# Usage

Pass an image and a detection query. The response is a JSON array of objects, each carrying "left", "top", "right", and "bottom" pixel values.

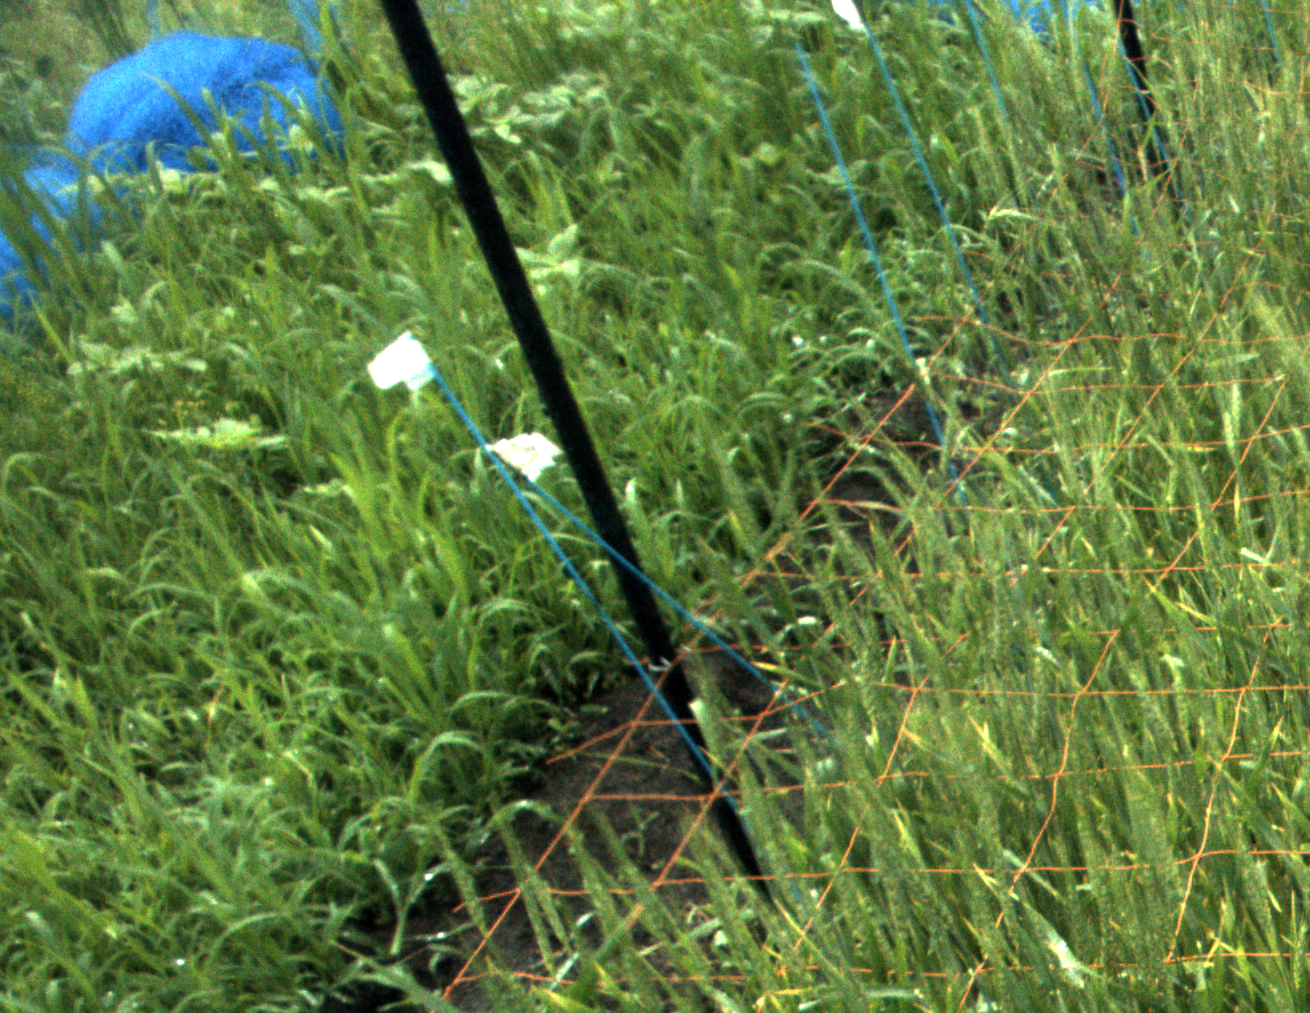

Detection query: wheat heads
[
  {"left": 871, "top": 836, "right": 956, "bottom": 929},
  {"left": 1249, "top": 151, "right": 1277, "bottom": 204},
  {"left": 1144, "top": 921, "right": 1174, "bottom": 1006},
  {"left": 984, "top": 834, "right": 1025, "bottom": 938},
  {"left": 810, "top": 558, "right": 839, "bottom": 627},
  {"left": 1118, "top": 192, "right": 1137, "bottom": 284},
  {"left": 1199, "top": 697, "right": 1218, "bottom": 752},
  {"left": 911, "top": 503, "right": 961, "bottom": 569},
  {"left": 999, "top": 695, "right": 1024, "bottom": 779},
  {"left": 721, "top": 894, "right": 794, "bottom": 1013},
  {"left": 1228, "top": 381, "right": 1242, "bottom": 434},
  {"left": 1141, "top": 866, "right": 1179, "bottom": 941},
  {"left": 1292, "top": 533, "right": 1310, "bottom": 627},
  {"left": 816, "top": 854, "right": 871, "bottom": 951},
  {"left": 1217, "top": 8, "right": 1242, "bottom": 83},
  {"left": 1194, "top": 476, "right": 1223, "bottom": 558},
  {"left": 507, "top": 969, "right": 546, "bottom": 1013},
  {"left": 696, "top": 853, "right": 759, "bottom": 964},
  {"left": 1221, "top": 237, "right": 1239, "bottom": 282},
  {"left": 855, "top": 774, "right": 904, "bottom": 846},
  {"left": 855, "top": 647, "right": 877, "bottom": 716},
  {"left": 442, "top": 849, "right": 489, "bottom": 939},
  {"left": 836, "top": 585, "right": 859, "bottom": 645},
  {"left": 1267, "top": 423, "right": 1293, "bottom": 455},
  {"left": 1075, "top": 817, "right": 1108, "bottom": 880},
  {"left": 1195, "top": 61, "right": 1205, "bottom": 126},
  {"left": 1055, "top": 552, "right": 1077, "bottom": 604},
  {"left": 1025, "top": 472, "right": 1054, "bottom": 504},
  {"left": 1055, "top": 434, "right": 1084, "bottom": 498},
  {"left": 730, "top": 874, "right": 806, "bottom": 958},
  {"left": 1304, "top": 143, "right": 1310, "bottom": 209},
  {"left": 1237, "top": 839, "right": 1273, "bottom": 940},
  {"left": 1180, "top": 157, "right": 1203, "bottom": 212},
  {"left": 862, "top": 895, "right": 896, "bottom": 963},
  {"left": 960, "top": 760, "right": 1003, "bottom": 834},
  {"left": 1099, "top": 124, "right": 1113, "bottom": 181},
  {"left": 886, "top": 450, "right": 921, "bottom": 494},
  {"left": 1110, "top": 841, "right": 1146, "bottom": 924},
  {"left": 518, "top": 880, "right": 557, "bottom": 973},
  {"left": 1029, "top": 655, "right": 1047, "bottom": 745},
  {"left": 1221, "top": 116, "right": 1242, "bottom": 166},
  {"left": 1171, "top": 54, "right": 1197, "bottom": 130},
  {"left": 1005, "top": 474, "right": 1037, "bottom": 510},
  {"left": 870, "top": 519, "right": 918, "bottom": 602},
  {"left": 1076, "top": 226, "right": 1113, "bottom": 285},
  {"left": 1071, "top": 44, "right": 1087, "bottom": 113},
  {"left": 1217, "top": 409, "right": 1238, "bottom": 460},
  {"left": 1290, "top": 422, "right": 1310, "bottom": 469},
  {"left": 1147, "top": 341, "right": 1192, "bottom": 416},
  {"left": 1018, "top": 57, "right": 1052, "bottom": 143},
  {"left": 1268, "top": 980, "right": 1309, "bottom": 1013},
  {"left": 1065, "top": 751, "right": 1088, "bottom": 807},
  {"left": 1152, "top": 183, "right": 1178, "bottom": 227},
  {"left": 878, "top": 857, "right": 918, "bottom": 938},
  {"left": 709, "top": 433, "right": 764, "bottom": 547},
  {"left": 1090, "top": 552, "right": 1110, "bottom": 607},
  {"left": 1289, "top": 923, "right": 1310, "bottom": 990},
  {"left": 1140, "top": 185, "right": 1175, "bottom": 285},
  {"left": 1274, "top": 513, "right": 1295, "bottom": 577},
  {"left": 1127, "top": 669, "right": 1173, "bottom": 747},
  {"left": 764, "top": 834, "right": 808, "bottom": 896},
  {"left": 1016, "top": 704, "right": 1038, "bottom": 755},
  {"left": 1147, "top": 809, "right": 1184, "bottom": 904},
  {"left": 618, "top": 950, "right": 666, "bottom": 1013},
  {"left": 1223, "top": 166, "right": 1248, "bottom": 214},
  {"left": 521, "top": 860, "right": 567, "bottom": 943},
  {"left": 836, "top": 526, "right": 914, "bottom": 631},
  {"left": 780, "top": 493, "right": 808, "bottom": 558},
  {"left": 1090, "top": 446, "right": 1106, "bottom": 517},
  {"left": 1204, "top": 360, "right": 1231, "bottom": 410},
  {"left": 1166, "top": 469, "right": 1180, "bottom": 508},
  {"left": 937, "top": 416, "right": 955, "bottom": 478},
  {"left": 697, "top": 672, "right": 724, "bottom": 751},
  {"left": 1278, "top": 351, "right": 1307, "bottom": 398},
  {"left": 1248, "top": 692, "right": 1268, "bottom": 744},
  {"left": 1199, "top": 138, "right": 1220, "bottom": 171},
  {"left": 577, "top": 868, "right": 637, "bottom": 953},
  {"left": 1058, "top": 235, "right": 1083, "bottom": 276},
  {"left": 622, "top": 857, "right": 685, "bottom": 933},
  {"left": 1205, "top": 59, "right": 1226, "bottom": 127},
  {"left": 1299, "top": 743, "right": 1310, "bottom": 817},
  {"left": 1164, "top": 109, "right": 1188, "bottom": 164},
  {"left": 1015, "top": 531, "right": 1050, "bottom": 587},
  {"left": 989, "top": 555, "right": 1008, "bottom": 672},
  {"left": 843, "top": 705, "right": 865, "bottom": 760},
  {"left": 1041, "top": 50, "right": 1086, "bottom": 133},
  {"left": 1172, "top": 670, "right": 1189, "bottom": 739},
  {"left": 1094, "top": 874, "right": 1118, "bottom": 978},
  {"left": 1058, "top": 847, "right": 1094, "bottom": 963},
  {"left": 1259, "top": 309, "right": 1310, "bottom": 405},
  {"left": 1197, "top": 517, "right": 1225, "bottom": 578},
  {"left": 1123, "top": 926, "right": 1155, "bottom": 977},
  {"left": 1077, "top": 558, "right": 1094, "bottom": 617},
  {"left": 1278, "top": 54, "right": 1295, "bottom": 129},
  {"left": 993, "top": 967, "right": 1018, "bottom": 1013},
  {"left": 482, "top": 977, "right": 533, "bottom": 1013}
]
